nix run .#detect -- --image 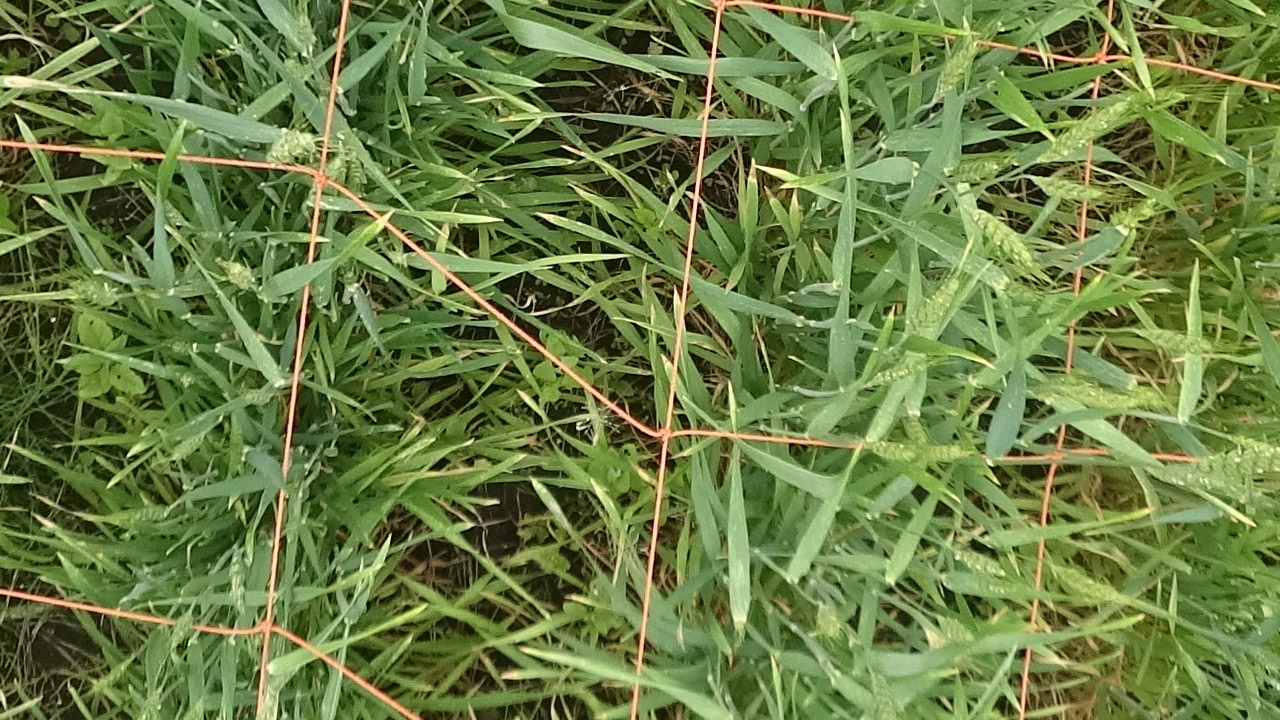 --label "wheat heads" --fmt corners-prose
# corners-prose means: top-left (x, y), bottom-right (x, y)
top-left (1185, 443), bottom-right (1280, 472)
top-left (945, 155), bottom-right (1002, 181)
top-left (1132, 321), bottom-right (1211, 355)
top-left (933, 612), bottom-right (969, 642)
top-left (212, 257), bottom-right (256, 291)
top-left (222, 547), bottom-right (252, 602)
top-left (172, 614), bottom-right (202, 645)
top-left (93, 661), bottom-right (133, 689)
top-left (1058, 378), bottom-right (1126, 410)
top-left (66, 280), bottom-right (114, 304)
top-left (296, 10), bottom-right (321, 49)
top-left (871, 667), bottom-right (898, 720)
top-left (1152, 463), bottom-right (1251, 495)
top-left (1054, 561), bottom-right (1116, 599)
top-left (902, 410), bottom-right (927, 441)
top-left (872, 438), bottom-right (909, 464)
top-left (964, 207), bottom-right (1047, 268)
top-left (814, 605), bottom-right (844, 632)
top-left (266, 131), bottom-right (314, 165)
top-left (937, 38), bottom-right (980, 95)
top-left (1041, 99), bottom-right (1134, 162)
top-left (860, 363), bottom-right (925, 386)
top-left (1038, 172), bottom-right (1096, 206)
top-left (950, 548), bottom-right (999, 576)
top-left (303, 158), bottom-right (352, 210)
top-left (912, 443), bottom-right (971, 462)
top-left (904, 284), bottom-right (951, 335)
